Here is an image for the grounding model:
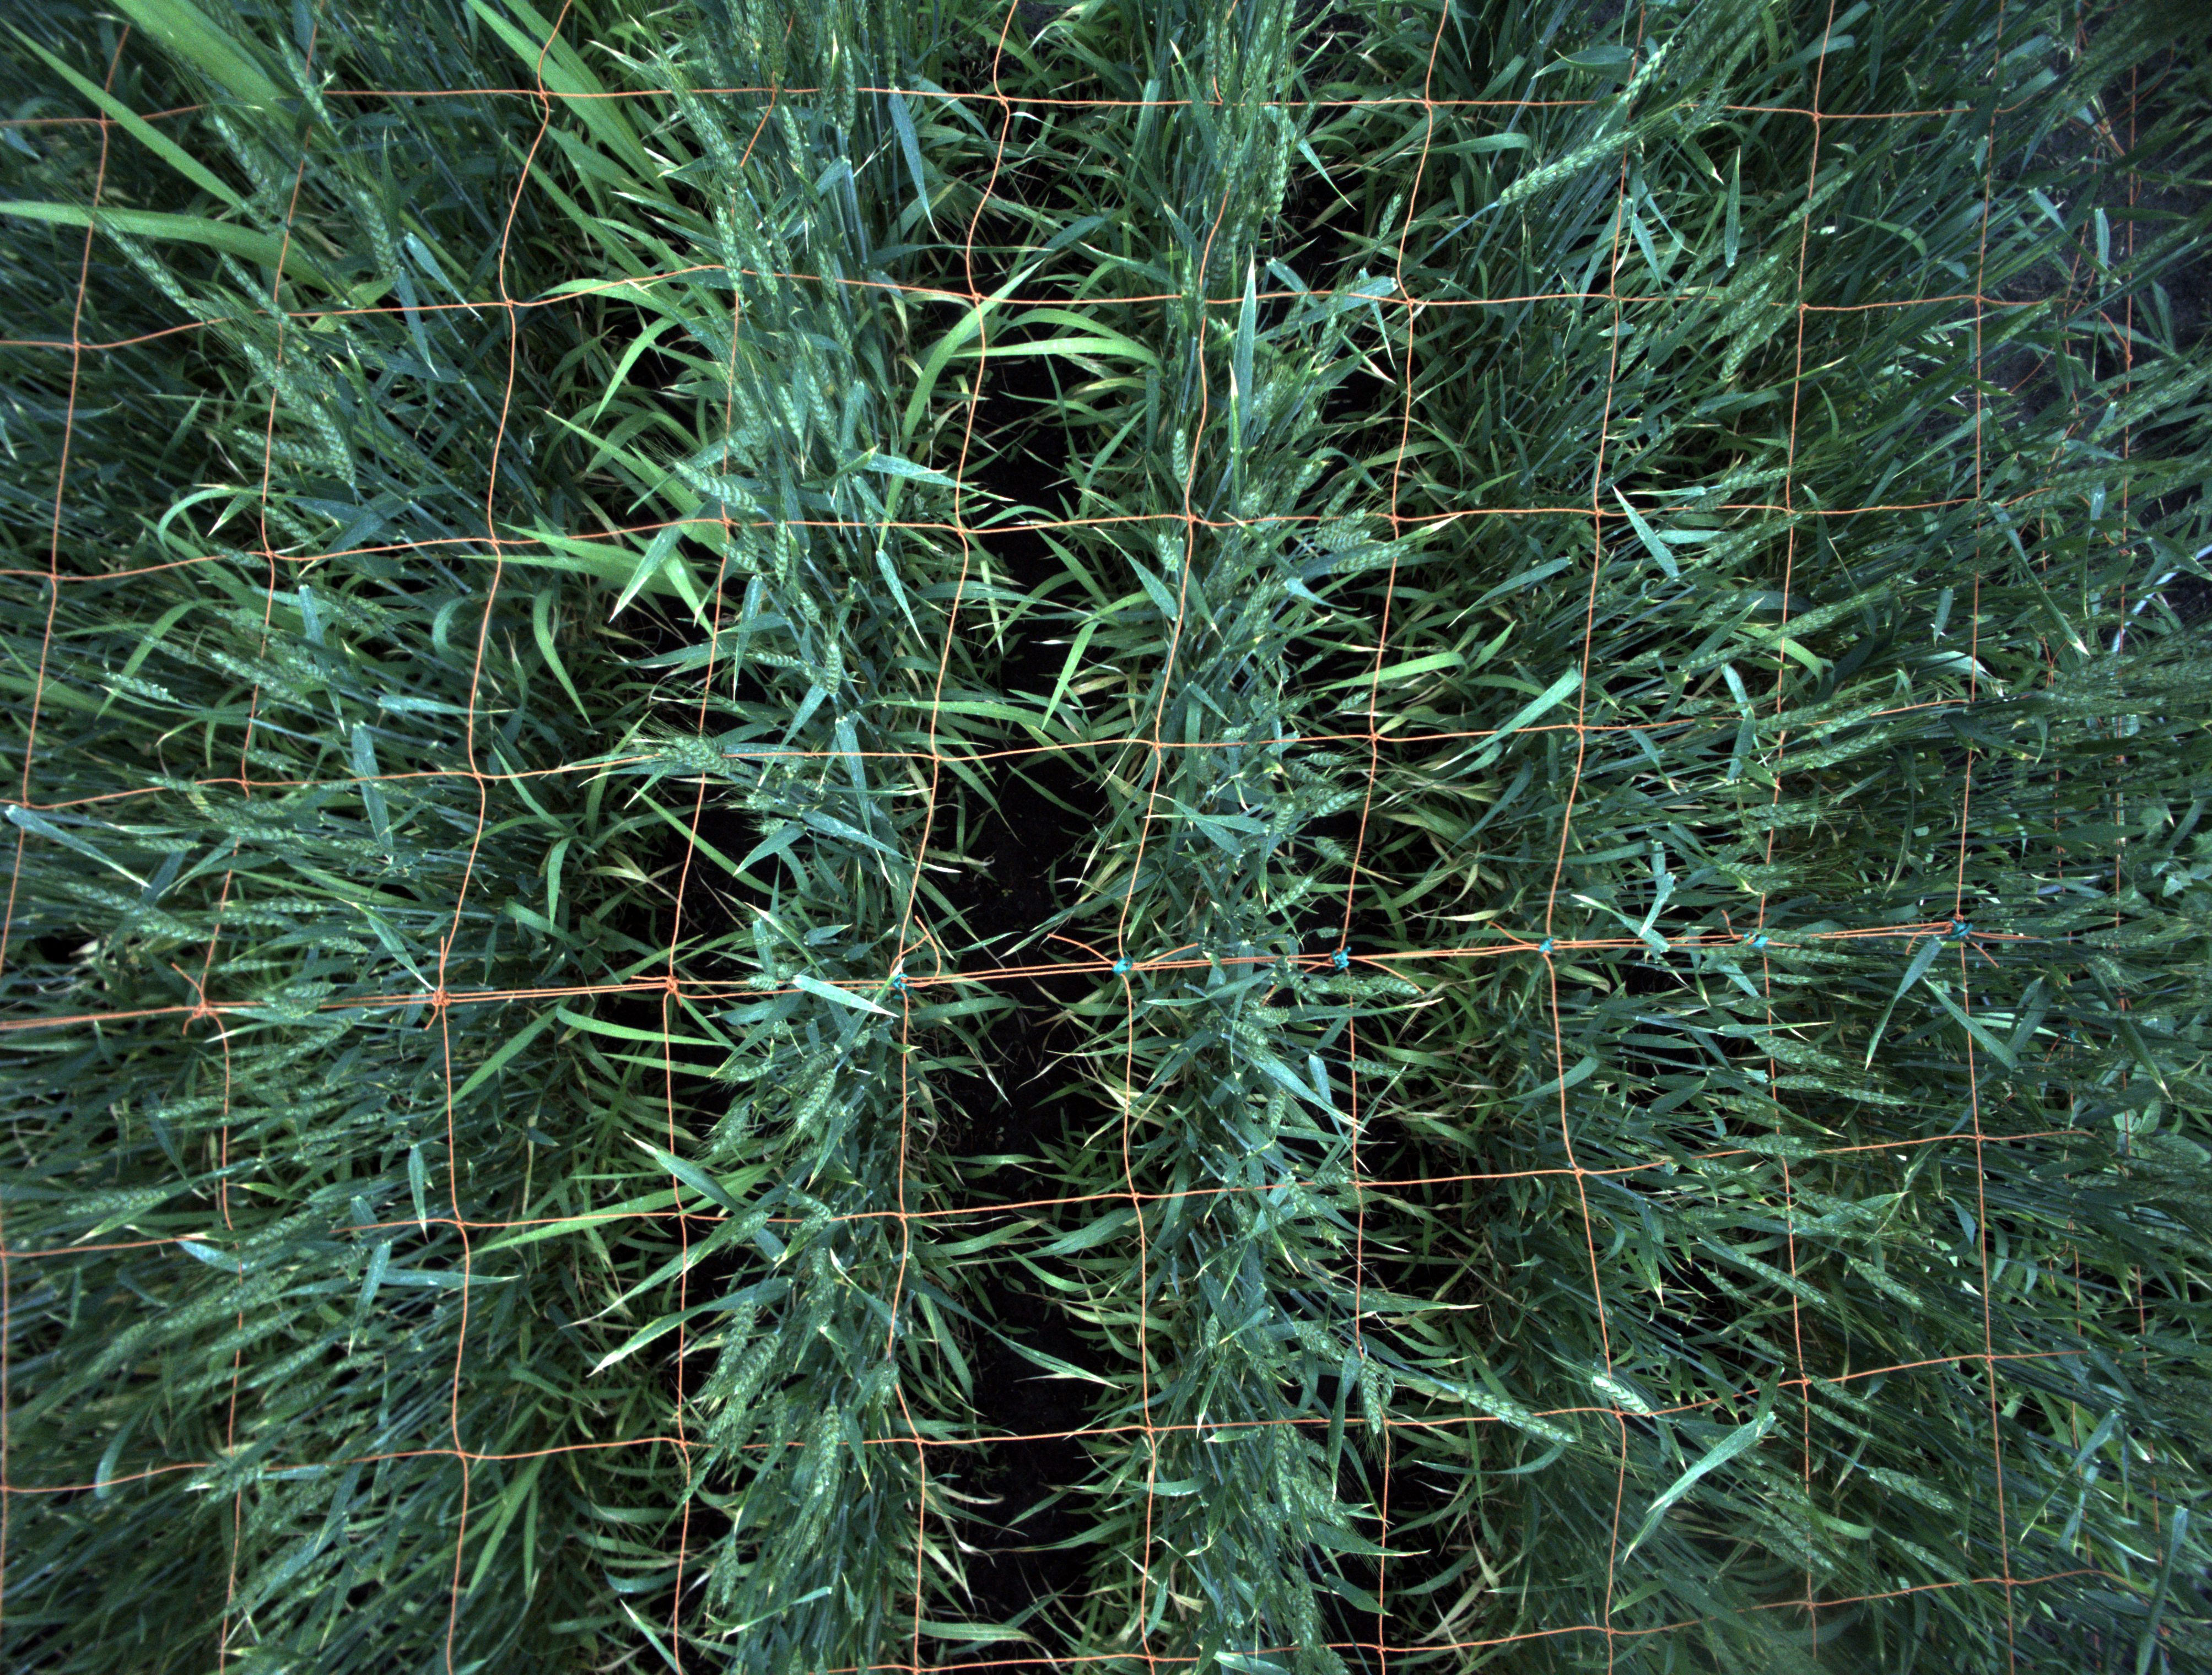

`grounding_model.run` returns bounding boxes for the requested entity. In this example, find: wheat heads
[2084,1096,2130,1109]
[1198,753,1214,786]
[1295,99,1317,143]
[2142,1224,2211,1256]
[1724,33,1751,70]
[719,1541,738,1602]
[1762,514,1802,541]
[1692,593,1739,631]
[330,68,361,115]
[878,1237,890,1261]
[2087,697,2167,718]
[1204,1312,1219,1350]
[264,1568,330,1618]
[810,1245,829,1275]
[194,1104,259,1129]
[1737,995,1776,1010]
[1709,280,1771,341]
[357,190,402,283]
[338,1301,388,1327]
[2019,763,2062,772]
[1192,851,1210,863]
[1273,37,1290,77]
[1720,539,1758,570]
[912,490,926,511]
[1717,1093,1765,1109]
[816,1298,835,1326]
[2133,1133,2206,1167]
[2180,531,2212,552]
[1314,314,1337,364]
[328,834,376,854]
[1316,925,1338,941]
[176,1364,244,1396]
[210,652,314,707]
[677,1469,709,1507]
[856,1654,870,1674]
[804,1281,841,1306]
[1759,1131,1802,1147]
[339,852,385,873]
[828,1095,843,1118]
[1325,1644,1348,1675]
[751,649,799,668]
[295,1076,345,1096]
[853,0,870,29]
[1254,115,1271,176]
[698,104,749,187]
[760,533,777,552]
[771,221,786,265]
[799,285,814,312]
[2000,1107,2088,1146]
[803,1196,832,1220]
[241,1503,266,1543]
[1674,699,1714,717]
[740,519,760,557]
[1220,1248,1231,1278]
[1315,1470,1334,1498]
[1306,786,1337,801]
[283,345,338,395]
[859,420,875,448]
[2005,481,2091,512]
[1753,926,1823,946]
[1223,725,1249,739]
[1246,224,1256,244]
[1179,266,1196,308]
[829,1539,843,1580]
[1768,972,1811,986]
[2104,222,2192,281]
[834,544,848,567]
[261,992,309,1023]
[214,113,288,221]
[225,794,287,818]
[2053,1056,2095,1069]
[867,1314,881,1343]
[2170,1087,2212,1103]
[268,1016,355,1064]
[838,359,852,399]
[2114,380,2156,409]
[1700,812,1738,825]
[1360,1359,1382,1434]
[2046,465,2138,486]
[820,2,834,48]
[1280,467,1294,498]
[1295,1454,1313,1512]
[1768,1206,1853,1239]
[773,1551,797,1592]
[1738,1589,1782,1629]
[1774,170,1853,231]
[1742,296,1774,323]
[1807,1374,1869,1414]
[1758,703,1835,731]
[1258,487,1277,512]
[729,1227,760,1245]
[707,306,734,346]
[0,1216,47,1248]
[1708,451,1767,495]
[1327,323,1347,352]
[232,426,333,469]
[1257,1232,1276,1247]
[1293,1642,1314,1675]
[1243,585,1269,617]
[1700,226,1744,269]
[239,1041,283,1059]
[1169,302,1186,324]
[2071,1472,2115,1517]
[1254,1326,1276,1355]
[792,1,816,65]
[2046,655,2136,693]
[328,1187,356,1204]
[2007,423,2052,439]
[2003,539,2040,577]
[312,1,355,57]
[1845,1256,1925,1308]
[1684,70,1729,139]
[1777,1505,1846,1560]
[2126,757,2181,783]
[2148,501,2210,532]
[333,605,380,637]
[726,1132,753,1150]
[2132,1459,2203,1482]
[102,220,202,319]
[818,44,836,119]
[2094,954,2124,987]
[693,28,733,105]
[1767,748,1825,770]
[138,22,228,94]
[1266,875,1314,914]
[1252,1007,1292,1023]
[1742,1330,1786,1360]
[1799,703,1885,740]
[88,1319,149,1375]
[2140,1395,2177,1415]
[258,1619,292,1647]
[1295,1590,1315,1649]
[805,1214,824,1234]
[1755,1534,1819,1574]
[1312,1171,1350,1188]
[1498,132,1635,206]
[1298,654,1323,674]
[1277,854,1297,867]
[1243,998,1265,1010]
[1205,574,1221,595]
[1319,478,1356,523]
[229,824,294,842]
[218,248,299,330]
[734,187,774,262]
[730,1407,758,1456]
[218,1271,275,1304]
[747,972,778,992]
[1170,429,1193,490]
[1702,1434,1765,1466]
[62,882,174,919]
[305,1479,339,1512]
[1687,1205,1728,1220]
[1538,851,1558,859]
[1318,527,1370,554]
[1991,517,2025,532]
[1700,946,1755,960]
[1246,494,1262,517]
[1763,604,1834,638]
[811,1405,840,1494]
[851,1589,865,1624]
[1284,1422,1301,1451]
[1359,1285,1387,1307]
[1245,1045,1267,1062]
[1606,570,1645,593]
[1803,733,1889,769]
[390,439,426,467]
[2176,691,2212,702]
[804,666,826,690]
[1316,791,1362,818]
[815,352,835,399]
[722,1,761,86]
[775,519,788,583]
[1265,1096,1277,1123]
[724,434,756,469]
[1718,321,1759,381]
[154,1094,224,1120]
[805,370,837,442]
[2008,784,2055,800]
[1268,108,1290,213]
[770,1388,785,1443]
[1243,902,1262,916]
[1242,742,1255,758]
[883,1,897,84]
[2169,1392,2210,1419]
[348,595,387,615]
[805,1406,826,1463]
[1282,0,1298,35]
[747,910,758,920]
[1245,1105,1258,1121]
[1701,2,1766,64]
[2153,619,2212,652]
[771,298,792,370]
[254,1069,310,1093]
[1274,1420,1290,1512]
[2092,845,2133,858]
[376,1141,408,1154]
[2045,615,2121,633]
[1564,1044,1590,1058]
[199,803,256,823]
[383,1329,411,1346]
[1591,1374,1652,1418]
[1290,612,1308,630]
[245,751,290,772]
[1232,1019,1269,1046]
[2087,366,2210,444]
[1309,750,1342,767]
[1694,522,1763,567]
[2120,1365,2168,1401]
[299,148,356,205]
[2096,553,2132,570]
[2164,152,2211,186]
[783,756,806,778]
[1716,860,1778,878]
[311,404,356,486]
[1231,723,1253,738]
[708,14,722,46]
[802,779,827,795]
[2071,40,2147,94]
[1365,973,1418,996]
[1578,351,1594,370]
[103,670,179,703]
[212,1305,303,1353]
[631,738,677,746]
[1721,466,1791,491]
[315,780,356,793]
[526,435,535,455]
[1742,801,1802,817]
[772,1018,793,1037]
[1771,1073,1825,1092]
[1283,757,1328,784]
[2082,1010,2164,1020]
[1727,813,1818,837]
[742,1214,772,1230]
[161,588,195,604]
[1248,1350,1270,1380]
[2144,101,2187,143]
[1600,587,1626,604]
[799,1068,836,1127]
[1744,1405,1791,1439]
[1681,320,1717,346]
[191,0,236,37]
[854,1027,871,1047]
[764,1,790,77]
[1663,1218,1698,1236]
[295,1125,341,1142]
[1292,1476,1351,1530]
[218,960,274,973]
[31,864,83,882]
[320,933,369,956]
[2094,763,2134,778]
[799,588,821,622]
[1285,1577,1299,1612]
[1258,511,1276,526]
[712,692,746,714]
[185,1453,239,1490]
[1455,1386,1572,1443]
[828,445,851,468]
[1680,8,1708,42]
[213,605,285,638]
[726,1265,742,1291]
[672,733,729,776]
[2035,691,2087,716]
[2069,1175,2118,1189]
[704,1560,722,1602]
[1712,793,1738,803]
[147,773,205,793]
[254,746,298,765]
[1155,531,1180,572]
[2149,1001,2202,1012]
[719,1102,748,1153]
[2045,895,2114,926]
[1288,1560,1316,1607]
[324,1407,367,1434]
[780,103,806,172]
[2082,929,2155,949]
[2111,774,2159,791]
[1645,422,1681,449]
[1314,835,1347,861]
[672,456,757,513]
[135,834,199,853]
[753,932,779,948]
[1746,1371,1796,1412]
[718,540,757,571]
[1225,140,1243,188]
[1755,1037,1804,1065]
[1864,1465,1953,1512]
[2101,359,2165,392]
[750,244,778,292]
[654,742,704,771]
[1345,1057,1401,1077]
[257,1535,309,1575]
[285,979,337,999]
[1219,1577,1233,1629]
[1667,251,1706,302]
[877,1362,899,1392]
[1710,254,1779,308]
[1279,699,1299,716]
[1203,85,1215,119]
[1893,1534,1973,1587]
[2126,1520,2203,1565]
[1676,95,1729,134]
[238,443,290,479]
[251,653,304,682]
[2163,1374,2211,1394]
[1204,16,1217,85]
[1243,1,1279,86]
[804,1050,837,1078]
[1336,694,1367,713]
[909,1253,922,1278]
[1242,1534,1278,1596]
[1308,978,1332,996]
[1958,555,2000,571]
[1175,339,1183,359]
[1238,164,1252,200]
[2071,1078,2118,1095]
[815,247,839,297]
[2166,1628,2211,1658]
[1212,1534,1223,1560]
[334,1352,376,1371]
[1747,879,1792,894]
[1264,367,1295,416]
[208,1560,285,1629]
[1747,297,1797,350]
[1250,1492,1281,1532]
[218,910,285,927]
[1726,692,1776,713]
[783,1325,801,1360]
[160,1276,239,1332]
[1315,507,1366,540]
[1707,843,1749,856]
[141,631,201,665]
[1842,1086,1905,1106]
[1324,1192,1347,1210]
[204,1458,273,1503]
[244,1208,316,1246]
[337,322,390,370]
[219,1270,294,1314]
[1236,1177,1252,1188]
[863,505,877,530]
[1209,211,1245,287]
[716,1296,757,1376]
[1380,1373,1398,1407]
[1378,192,1402,239]
[1995,299,2051,345]
[702,1434,733,1464]
[1218,560,1236,605]
[284,1098,339,1119]
[2173,58,2211,87]
[324,588,360,614]
[1250,382,1275,419]
[826,300,852,350]
[239,198,277,230]
[1241,52,1273,127]
[2106,893,2165,919]
[778,383,804,442]
[805,1518,821,1546]
[1684,640,1751,669]
[1612,1139,1642,1157]
[1239,489,1256,511]
[789,1645,805,1675]
[2144,656,2211,686]
[52,1266,77,1278]
[240,1239,283,1261]
[893,497,903,517]
[1992,396,2020,413]
[814,1657,827,1674]
[1330,971,1373,997]
[1790,1191,1879,1221]
[1673,7,1720,76]
[2032,1,2064,16]
[1332,541,1409,574]
[724,756,754,779]
[1280,293,1308,332]
[2121,1156,2187,1179]
[1678,1214,1724,1246]
[1216,106,1233,159]
[1281,1174,1316,1214]
[1704,1627,1746,1673]
[885,1557,920,1581]
[662,61,707,141]
[1661,298,1692,329]
[1771,947,1850,965]
[370,1463,408,1500]
[736,218,750,259]
[1617,38,1674,109]
[1291,462,1314,495]
[1211,935,1222,952]
[1219,18,1232,91]
[842,1297,854,1321]
[82,1391,138,1414]
[1623,648,1661,670]
[1271,1090,1289,1124]
[1265,1202,1285,1226]
[1304,464,1324,488]
[1287,969,1317,1003]
[759,816,787,836]
[215,1155,254,1176]
[1765,1509,1835,1570]
[1284,1354,1309,1386]
[246,1338,329,1389]
[705,1378,763,1438]
[271,1481,316,1532]
[1977,709,2026,725]
[732,382,769,462]
[2063,726,2116,746]
[741,1063,776,1081]
[2086,0,2107,17]
[1252,609,1270,636]
[714,203,744,295]
[1258,682,1270,704]
[2182,23,2211,52]
[286,656,328,683]
[1700,1266,1746,1302]
[1692,491,1733,512]
[1261,702,1280,721]
[2178,122,2211,151]
[2083,0,2138,53]
[2165,1298,2207,1320]
[2188,1427,2211,1443]
[745,790,777,811]
[2193,1439,2211,1455]
[1219,1355,1233,1386]
[295,1545,358,1577]
[697,733,726,754]
[1797,1396,1874,1439]
[843,1106,855,1127]
[839,43,857,130]
[718,1329,780,1396]
[270,642,307,661]
[2069,14,2144,82]
[1770,1036,1844,1070]
[1198,656,1214,674]
[65,1184,167,1216]
[1331,279,1366,303]
[305,252,341,283]
[1315,1218,1336,1241]
[325,1247,366,1270]
[291,1142,338,1161]
[824,641,841,694]
[1791,592,1870,637]
[2130,797,2178,805]
[212,540,268,569]
[2137,862,2150,877]
[65,914,112,927]
[2119,1178,2211,1208]
[777,962,798,980]
[136,920,221,943]
[1291,1319,1344,1362]
[218,2,255,37]
[1231,1198,1250,1224]
[372,778,413,799]
[1303,1437,1326,1463]
[1276,802,1294,833]
[1243,542,1267,568]
[1581,301,1618,330]
[240,340,317,427]
[273,844,308,858]
[1619,320,1652,372]
[1747,1465,1810,1506]
[1292,409,1318,438]
[2143,458,2210,500]
[775,1080,797,1101]
[1719,1134,1818,1158]
[280,1477,312,1499]
[1742,1106,1784,1125]
[729,1060,749,1081]
[746,2,766,42]
[275,28,331,127]
[1629,1322,1654,1343]
[261,503,323,549]
[1234,1449,1247,1490]
[1965,906,2010,919]
[247,899,324,917]
[1195,292,1208,324]
[1693,1158,1736,1177]
[1732,1247,1827,1307]
[351,1111,381,1125]
[262,1377,314,1409]
[823,1471,841,1517]
[290,1377,331,1405]
[798,1139,824,1163]
[2097,1047,2174,1062]
[2055,80,2106,125]
[2158,963,2205,974]
[1263,433,1281,460]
